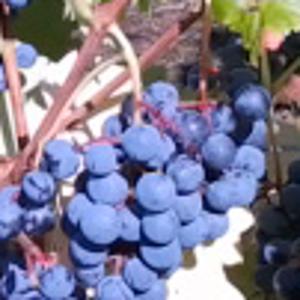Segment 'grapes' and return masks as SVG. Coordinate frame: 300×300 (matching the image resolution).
Masks as SVG:
<instances>
[{"label": "grapes", "instance_id": "1", "mask_svg": "<svg viewBox=\"0 0 300 300\" xmlns=\"http://www.w3.org/2000/svg\"><path fill=\"white\" fill-rule=\"evenodd\" d=\"M141 100L145 120L133 95L102 120L109 143L83 151L67 137L51 139L22 185L0 190V239L14 242L55 231L57 182L75 178L60 228L76 268H27L7 254L1 300H72L79 287L93 289L95 300H167V279L191 248L224 237L230 210L253 206L268 176L272 97L262 81L236 85L209 118L181 109L180 89L162 79L144 85Z\"/></svg>", "mask_w": 300, "mask_h": 300}, {"label": "grapes", "instance_id": "3", "mask_svg": "<svg viewBox=\"0 0 300 300\" xmlns=\"http://www.w3.org/2000/svg\"><path fill=\"white\" fill-rule=\"evenodd\" d=\"M15 66L23 69H29L34 66L37 60V51L35 47L20 43L14 49Z\"/></svg>", "mask_w": 300, "mask_h": 300}, {"label": "grapes", "instance_id": "4", "mask_svg": "<svg viewBox=\"0 0 300 300\" xmlns=\"http://www.w3.org/2000/svg\"><path fill=\"white\" fill-rule=\"evenodd\" d=\"M31 0H7L9 9L13 11H24L29 8Z\"/></svg>", "mask_w": 300, "mask_h": 300}, {"label": "grapes", "instance_id": "2", "mask_svg": "<svg viewBox=\"0 0 300 300\" xmlns=\"http://www.w3.org/2000/svg\"><path fill=\"white\" fill-rule=\"evenodd\" d=\"M260 264L255 285L277 300L300 298V160L291 162L289 180L279 190V207L265 205L256 215Z\"/></svg>", "mask_w": 300, "mask_h": 300}]
</instances>
